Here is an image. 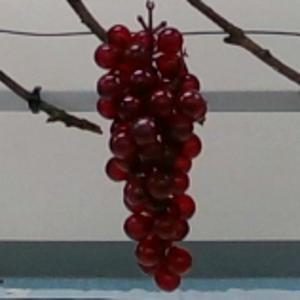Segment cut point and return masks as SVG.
<instances>
[{
    "label": "cut point",
    "mask_w": 300,
    "mask_h": 300,
    "mask_svg": "<svg viewBox=\"0 0 300 300\" xmlns=\"http://www.w3.org/2000/svg\"><path fill=\"white\" fill-rule=\"evenodd\" d=\"M156 8V3L154 0H146L145 9L148 13V31L153 33V15Z\"/></svg>",
    "instance_id": "obj_1"
}]
</instances>
